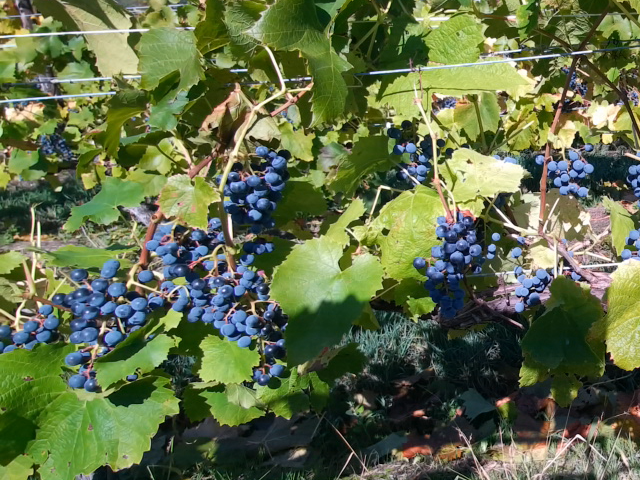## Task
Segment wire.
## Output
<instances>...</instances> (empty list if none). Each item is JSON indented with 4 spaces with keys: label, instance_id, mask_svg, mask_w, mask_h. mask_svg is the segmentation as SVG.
Here are the masks:
<instances>
[{
    "label": "wire",
    "instance_id": "wire-1",
    "mask_svg": "<svg viewBox=\"0 0 640 480\" xmlns=\"http://www.w3.org/2000/svg\"><path fill=\"white\" fill-rule=\"evenodd\" d=\"M629 49H640V44L615 45L609 48L572 50V51H564L559 53L529 54L521 57L502 58L498 60L482 61V62H475V63H470V62L450 63V64L428 65V66H406V67H398V68H390V69H376V70H371L367 72H356L355 76L369 77V76H374L378 74H392V73H400V72H408V71H430V70H442V69H452V68H477V67L501 65L504 63L523 62L531 59L561 58V57L575 56V55L602 54V53L615 52L617 50H629Z\"/></svg>",
    "mask_w": 640,
    "mask_h": 480
},
{
    "label": "wire",
    "instance_id": "wire-3",
    "mask_svg": "<svg viewBox=\"0 0 640 480\" xmlns=\"http://www.w3.org/2000/svg\"><path fill=\"white\" fill-rule=\"evenodd\" d=\"M115 89H108L95 93H78V94H64V95H36L29 97H19L15 99H0V104H17L21 102H31L38 100H66V99H80V98H97L104 97L106 95L115 94Z\"/></svg>",
    "mask_w": 640,
    "mask_h": 480
},
{
    "label": "wire",
    "instance_id": "wire-2",
    "mask_svg": "<svg viewBox=\"0 0 640 480\" xmlns=\"http://www.w3.org/2000/svg\"><path fill=\"white\" fill-rule=\"evenodd\" d=\"M151 27L147 28H125V29H98V30H60L59 33L38 32V33H16L0 35V40L18 39V38H80L86 35L100 34H127V33H149Z\"/></svg>",
    "mask_w": 640,
    "mask_h": 480
},
{
    "label": "wire",
    "instance_id": "wire-4",
    "mask_svg": "<svg viewBox=\"0 0 640 480\" xmlns=\"http://www.w3.org/2000/svg\"><path fill=\"white\" fill-rule=\"evenodd\" d=\"M512 274H513L512 270H502L499 272H491V273H485V274H465L464 278L465 279H487V278L502 277L505 275H512Z\"/></svg>",
    "mask_w": 640,
    "mask_h": 480
}]
</instances>
